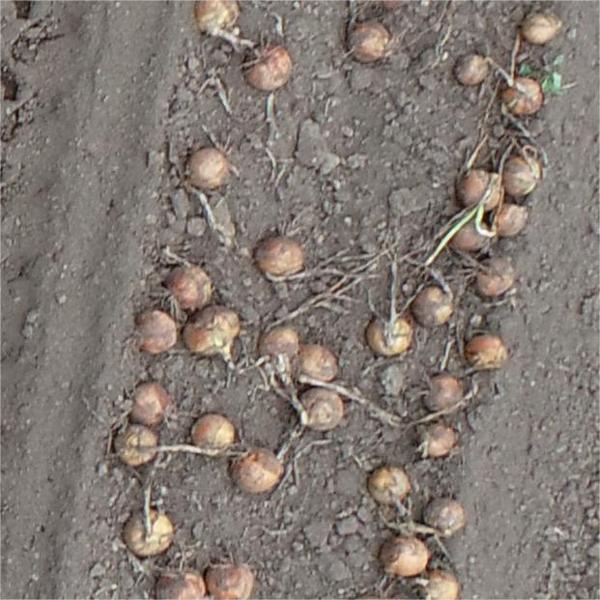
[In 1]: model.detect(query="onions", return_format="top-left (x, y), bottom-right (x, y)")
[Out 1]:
top-left (456, 168), bottom-right (499, 207)
top-left (128, 382), bottom-right (169, 425)
top-left (185, 147), bottom-right (231, 192)
top-left (499, 155), bottom-right (542, 196)
top-left (119, 426), bottom-right (158, 467)
top-left (453, 53), bottom-right (493, 84)
top-left (465, 332), bottom-right (506, 369)
top-left (501, 76), bottom-right (540, 115)
top-left (137, 311), bottom-right (174, 354)
top-left (425, 371), bottom-right (463, 411)
top-left (192, 412), bottom-right (235, 452)
top-left (379, 533), bottom-right (425, 575)
top-left (300, 389), bottom-right (341, 430)
top-left (368, 464), bottom-right (410, 503)
top-left (425, 497), bottom-right (463, 534)
top-left (253, 233), bottom-right (302, 278)
top-left (167, 264), bottom-right (211, 309)
top-left (205, 561), bottom-right (253, 599)
top-left (411, 284), bottom-right (452, 323)
top-left (260, 325), bottom-right (299, 360)
top-left (154, 569), bottom-right (203, 599)
top-left (183, 307), bottom-right (238, 357)
top-left (495, 204), bottom-right (526, 236)
top-left (365, 316), bottom-right (409, 356)
top-left (419, 563), bottom-right (460, 599)
top-left (244, 45), bottom-right (289, 90)
top-left (123, 510), bottom-right (170, 556)
top-left (295, 343), bottom-right (336, 383)
top-left (520, 8), bottom-right (559, 45)
top-left (424, 425), bottom-right (455, 456)
top-left (228, 447), bottom-right (281, 493)
top-left (474, 258), bottom-right (513, 297)
top-left (194, 0), bottom-right (237, 38)
top-left (453, 224), bottom-right (488, 254)
top-left (348, 18), bottom-right (388, 60)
